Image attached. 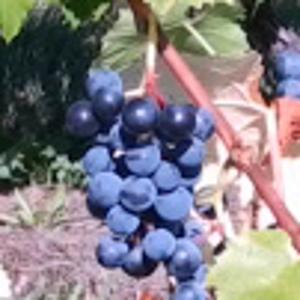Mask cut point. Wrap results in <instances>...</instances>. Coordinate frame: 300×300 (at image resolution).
Here are the masks:
<instances>
[{"label": "cut point", "instance_id": "cut-point-1", "mask_svg": "<svg viewBox=\"0 0 300 300\" xmlns=\"http://www.w3.org/2000/svg\"><path fill=\"white\" fill-rule=\"evenodd\" d=\"M157 55V40L154 34L147 36V43L145 44V56H144V73L141 78L140 84H147L154 80L155 66Z\"/></svg>", "mask_w": 300, "mask_h": 300}]
</instances>
